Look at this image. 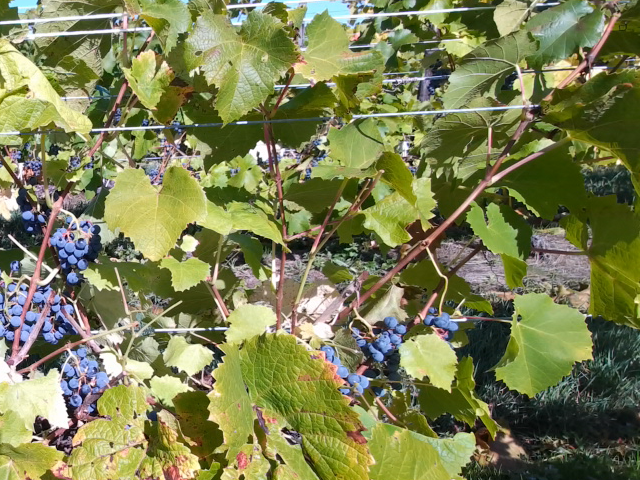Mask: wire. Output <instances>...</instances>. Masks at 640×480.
<instances>
[{
	"mask_svg": "<svg viewBox=\"0 0 640 480\" xmlns=\"http://www.w3.org/2000/svg\"><path fill=\"white\" fill-rule=\"evenodd\" d=\"M466 11H474V12H490L493 13L494 9L492 7H476V6H464L458 9H426V10H404L400 12H389V13H355L353 15H338L335 14L334 18L336 20H355L358 18L361 19H369V18H391V17H402L406 15H428V14H461Z\"/></svg>",
	"mask_w": 640,
	"mask_h": 480,
	"instance_id": "wire-2",
	"label": "wire"
},
{
	"mask_svg": "<svg viewBox=\"0 0 640 480\" xmlns=\"http://www.w3.org/2000/svg\"><path fill=\"white\" fill-rule=\"evenodd\" d=\"M223 124L222 120L213 122H177L166 125H130V126H117L111 128H91V133H113L119 131H132V130H168L179 127H215Z\"/></svg>",
	"mask_w": 640,
	"mask_h": 480,
	"instance_id": "wire-3",
	"label": "wire"
},
{
	"mask_svg": "<svg viewBox=\"0 0 640 480\" xmlns=\"http://www.w3.org/2000/svg\"><path fill=\"white\" fill-rule=\"evenodd\" d=\"M64 132H65L64 128H58L54 130H45V131H18V132L2 131L0 132V137L48 136V135L61 134Z\"/></svg>",
	"mask_w": 640,
	"mask_h": 480,
	"instance_id": "wire-8",
	"label": "wire"
},
{
	"mask_svg": "<svg viewBox=\"0 0 640 480\" xmlns=\"http://www.w3.org/2000/svg\"><path fill=\"white\" fill-rule=\"evenodd\" d=\"M229 326H209V327H186V326H166V327H152L143 329V334H150L154 332L164 333L168 331H184V332H211V331H229Z\"/></svg>",
	"mask_w": 640,
	"mask_h": 480,
	"instance_id": "wire-7",
	"label": "wire"
},
{
	"mask_svg": "<svg viewBox=\"0 0 640 480\" xmlns=\"http://www.w3.org/2000/svg\"><path fill=\"white\" fill-rule=\"evenodd\" d=\"M125 13H87L80 16H71V17H55V18H28V19H6L0 20V25H8V24H30V23H57V22H73V21H82L89 18H100V19H109V18H124Z\"/></svg>",
	"mask_w": 640,
	"mask_h": 480,
	"instance_id": "wire-5",
	"label": "wire"
},
{
	"mask_svg": "<svg viewBox=\"0 0 640 480\" xmlns=\"http://www.w3.org/2000/svg\"><path fill=\"white\" fill-rule=\"evenodd\" d=\"M541 103H530V104H516V105H504V106H496V107H456L453 109H429V110H420V111H400L395 113H378V114H354V119H380V118H397L402 116H422V115H431V114H455L458 112H480V113H491L498 111H506V110H518V109H532V108H541Z\"/></svg>",
	"mask_w": 640,
	"mask_h": 480,
	"instance_id": "wire-1",
	"label": "wire"
},
{
	"mask_svg": "<svg viewBox=\"0 0 640 480\" xmlns=\"http://www.w3.org/2000/svg\"><path fill=\"white\" fill-rule=\"evenodd\" d=\"M151 27H121L118 29H88V30H67V31H41L34 32L28 35L29 39L36 37L52 36V37H65V36H87L93 34H120L122 32H135L144 33L151 32Z\"/></svg>",
	"mask_w": 640,
	"mask_h": 480,
	"instance_id": "wire-4",
	"label": "wire"
},
{
	"mask_svg": "<svg viewBox=\"0 0 640 480\" xmlns=\"http://www.w3.org/2000/svg\"><path fill=\"white\" fill-rule=\"evenodd\" d=\"M332 116H316L312 118H273L260 121H227V126H262L275 123H314L318 121H332Z\"/></svg>",
	"mask_w": 640,
	"mask_h": 480,
	"instance_id": "wire-6",
	"label": "wire"
}]
</instances>
